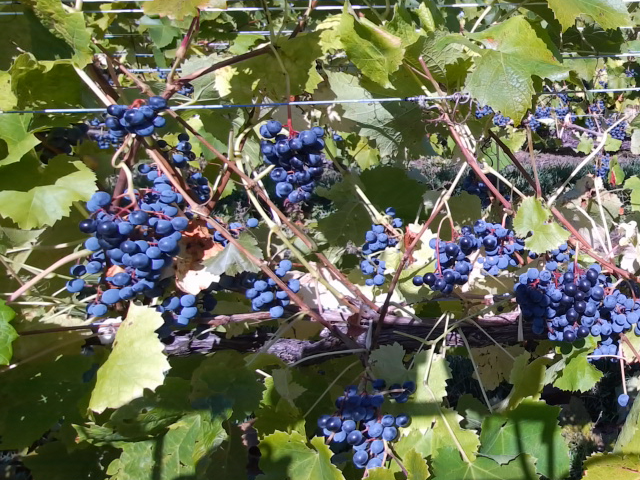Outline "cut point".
Segmentation results:
<instances>
[{"label": "cut point", "instance_id": "6a23745f", "mask_svg": "<svg viewBox=\"0 0 640 480\" xmlns=\"http://www.w3.org/2000/svg\"><path fill=\"white\" fill-rule=\"evenodd\" d=\"M269 49L273 52V54L275 56V59L278 62L279 66H280V68L282 70V74H283L285 85L289 86L290 85V79H289V76H288L287 68H286V66H285V64H284V62H283V60H282V58H281V56L279 54V51L273 45H270Z\"/></svg>", "mask_w": 640, "mask_h": 480}, {"label": "cut point", "instance_id": "7d7e1d6f", "mask_svg": "<svg viewBox=\"0 0 640 480\" xmlns=\"http://www.w3.org/2000/svg\"><path fill=\"white\" fill-rule=\"evenodd\" d=\"M119 164L122 166V168L125 171V174L127 176L128 183H129L130 194L134 195L135 194V187H134V181H133L132 174H131L130 170L128 169V166L126 165V163H125V161L123 159L119 160Z\"/></svg>", "mask_w": 640, "mask_h": 480}, {"label": "cut point", "instance_id": "deb38ca7", "mask_svg": "<svg viewBox=\"0 0 640 480\" xmlns=\"http://www.w3.org/2000/svg\"><path fill=\"white\" fill-rule=\"evenodd\" d=\"M444 208H445V211H446L447 216H448V224L452 225L453 224V213H452V210H451V208L449 206L448 200L445 203Z\"/></svg>", "mask_w": 640, "mask_h": 480}]
</instances>
